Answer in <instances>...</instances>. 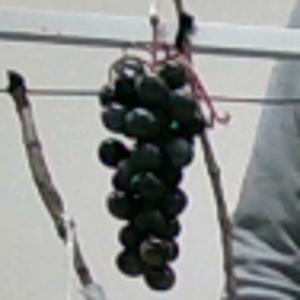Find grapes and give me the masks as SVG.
<instances>
[{
    "label": "grapes",
    "instance_id": "01657485",
    "mask_svg": "<svg viewBox=\"0 0 300 300\" xmlns=\"http://www.w3.org/2000/svg\"><path fill=\"white\" fill-rule=\"evenodd\" d=\"M189 82L187 66L179 60L162 62L160 70H144L136 77L123 74L100 87L101 121L116 137L102 141L98 158L113 171L111 189L104 197L110 217L126 221L116 241L118 273L128 279L142 277L151 291L172 290L178 261L177 241L183 231L179 215L189 199L181 190L182 169L194 159V140L205 127L197 98L183 92Z\"/></svg>",
    "mask_w": 300,
    "mask_h": 300
}]
</instances>
